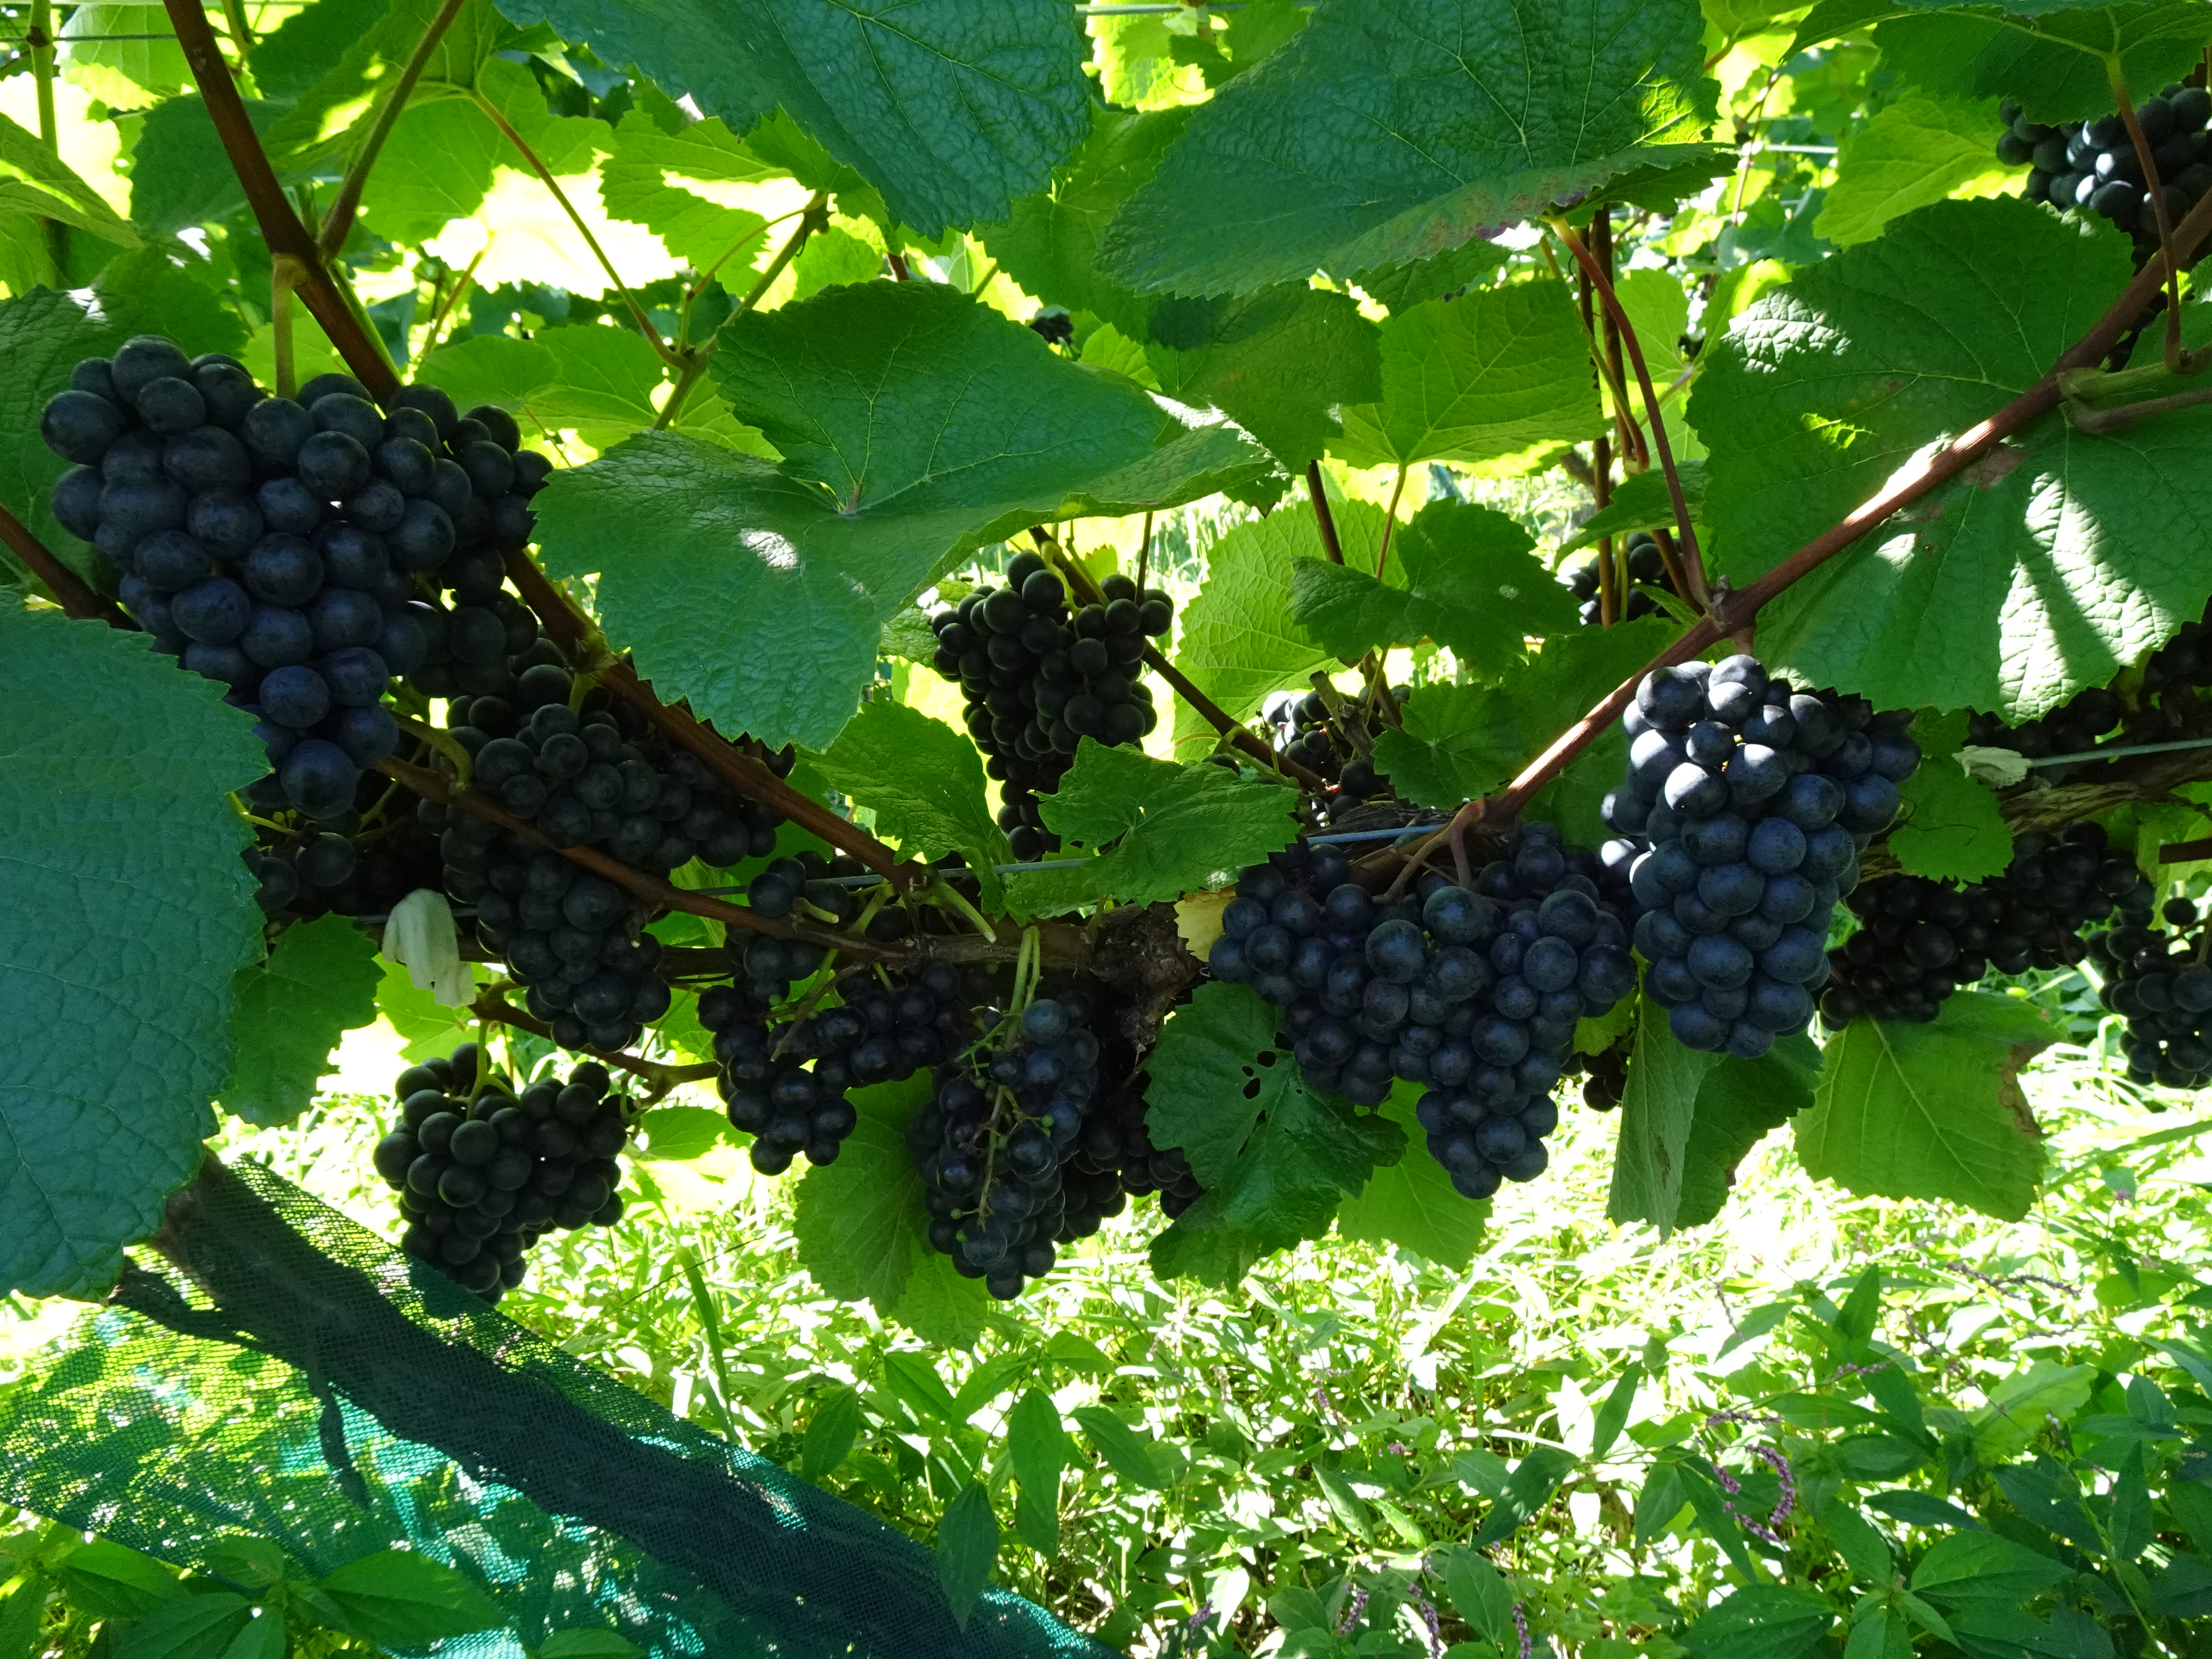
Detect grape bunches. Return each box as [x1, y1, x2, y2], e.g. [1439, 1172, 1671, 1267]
[1960, 820, 2141, 974]
[1569, 533, 1685, 628]
[907, 992, 1099, 1300]
[1035, 575, 1174, 755]
[932, 549, 1075, 863]
[1960, 686, 2120, 788]
[1366, 820, 1641, 1199]
[1119, 1089, 1207, 1220]
[374, 1044, 554, 1318]
[388, 384, 551, 698]
[2139, 596, 2212, 713]
[1996, 82, 2212, 277]
[724, 849, 900, 985]
[416, 702, 728, 1052]
[869, 850, 982, 943]
[2084, 898, 2212, 1090]
[1202, 684, 1411, 825]
[446, 622, 574, 739]
[650, 660, 799, 868]
[521, 1061, 638, 1231]
[1052, 1039, 1127, 1246]
[698, 971, 868, 1176]
[1208, 834, 1459, 1113]
[836, 959, 994, 1088]
[1601, 653, 1923, 1058]
[40, 338, 473, 905]
[285, 727, 444, 922]
[1810, 873, 1992, 1030]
